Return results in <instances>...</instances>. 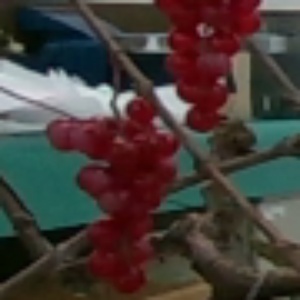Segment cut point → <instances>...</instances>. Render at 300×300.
Segmentation results:
<instances>
[{"instance_id":"cut-point-1","label":"cut point","mask_w":300,"mask_h":300,"mask_svg":"<svg viewBox=\"0 0 300 300\" xmlns=\"http://www.w3.org/2000/svg\"><path fill=\"white\" fill-rule=\"evenodd\" d=\"M107 53V61L109 66L112 68V79L114 86V93L110 97L109 105L113 110V118L116 120L120 118V110L117 106V99L121 96V84H120V76H119V67L114 58V50L112 48H108L106 50Z\"/></svg>"}]
</instances>
